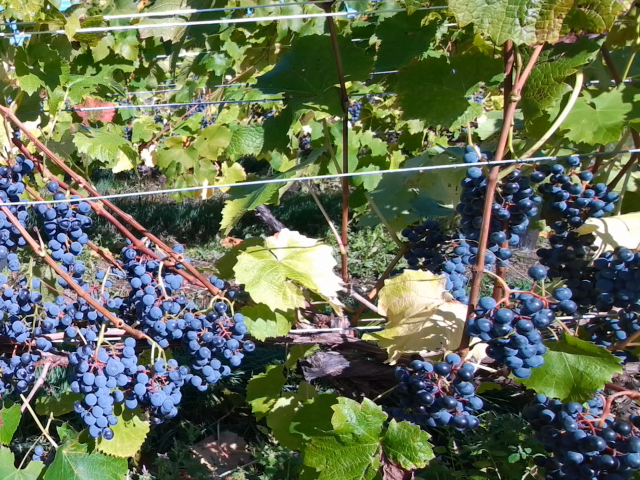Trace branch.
Masks as SVG:
<instances>
[{"label": "branch", "mask_w": 640, "mask_h": 480, "mask_svg": "<svg viewBox=\"0 0 640 480\" xmlns=\"http://www.w3.org/2000/svg\"><path fill=\"white\" fill-rule=\"evenodd\" d=\"M87 245L97 254L102 256L105 259V261L116 270H120L122 268V265L118 261L113 259L107 251H105L100 246H98L93 240H89L87 242Z\"/></svg>", "instance_id": "1af6ec82"}, {"label": "branch", "mask_w": 640, "mask_h": 480, "mask_svg": "<svg viewBox=\"0 0 640 480\" xmlns=\"http://www.w3.org/2000/svg\"><path fill=\"white\" fill-rule=\"evenodd\" d=\"M407 251L406 247H402L401 249H399L395 256L393 257V259L390 261V263L388 264V266L386 267V269L383 270L378 282L376 283L375 287L373 288V290L368 294V299L372 300L373 297L376 295V293L379 291V289L381 288V285L383 284V282L386 279L387 274L393 269L394 265L398 262V259L400 258V256L402 254H404Z\"/></svg>", "instance_id": "1d269e1b"}, {"label": "branch", "mask_w": 640, "mask_h": 480, "mask_svg": "<svg viewBox=\"0 0 640 480\" xmlns=\"http://www.w3.org/2000/svg\"><path fill=\"white\" fill-rule=\"evenodd\" d=\"M2 213L14 224L16 230L21 233L27 243L30 245L32 251L36 253L39 257H41L52 270H54L58 275L62 277V279L73 288V290L83 299H85L91 306L96 308L98 312L112 324L117 325L125 332L132 334L135 338H142L144 333L142 331H138L134 327L126 324L121 319L111 315L97 300H95L91 295H89L85 290H83L79 284L72 279L68 273L62 269L58 264H56L51 257L42 249L39 248L38 244L31 237L29 231L23 227L19 219L9 210L7 206L1 207Z\"/></svg>", "instance_id": "45aa463d"}, {"label": "branch", "mask_w": 640, "mask_h": 480, "mask_svg": "<svg viewBox=\"0 0 640 480\" xmlns=\"http://www.w3.org/2000/svg\"><path fill=\"white\" fill-rule=\"evenodd\" d=\"M503 295H504L503 286L499 282H497V280H494L492 299L495 301L496 308L502 307Z\"/></svg>", "instance_id": "2b1400db"}, {"label": "branch", "mask_w": 640, "mask_h": 480, "mask_svg": "<svg viewBox=\"0 0 640 480\" xmlns=\"http://www.w3.org/2000/svg\"><path fill=\"white\" fill-rule=\"evenodd\" d=\"M606 387L614 392L626 391L628 393V396H627L628 398L633 400H640V392H637L631 389H626L625 387H620L613 382H608L606 384Z\"/></svg>", "instance_id": "8bde2521"}, {"label": "branch", "mask_w": 640, "mask_h": 480, "mask_svg": "<svg viewBox=\"0 0 640 480\" xmlns=\"http://www.w3.org/2000/svg\"><path fill=\"white\" fill-rule=\"evenodd\" d=\"M364 308H365V305H364V304H360V305L357 307V309L355 310V312H354V314H353V316H352V318H351V322H352V323H355V322H356V320H357V318H358L359 314L361 313V311H362Z\"/></svg>", "instance_id": "a944a4c4"}, {"label": "branch", "mask_w": 640, "mask_h": 480, "mask_svg": "<svg viewBox=\"0 0 640 480\" xmlns=\"http://www.w3.org/2000/svg\"><path fill=\"white\" fill-rule=\"evenodd\" d=\"M348 178H343L342 196H343V210H342V253H343V274L342 279L344 282L348 281V233H347V212H348Z\"/></svg>", "instance_id": "ca6c30ca"}, {"label": "branch", "mask_w": 640, "mask_h": 480, "mask_svg": "<svg viewBox=\"0 0 640 480\" xmlns=\"http://www.w3.org/2000/svg\"><path fill=\"white\" fill-rule=\"evenodd\" d=\"M11 142L14 144V146L18 149V151L20 153H22L23 155H25L34 165V167L36 168V170L47 180L51 181H56L59 185V188L65 190L67 193H69L71 196L72 195H81L82 199L84 197V194L81 191H78L74 188H72L69 184H67L66 182H63L62 180H60L58 177L52 175L50 172H48L41 164V162L39 161V159L28 149L26 148L17 137H13L11 139Z\"/></svg>", "instance_id": "ea751061"}, {"label": "branch", "mask_w": 640, "mask_h": 480, "mask_svg": "<svg viewBox=\"0 0 640 480\" xmlns=\"http://www.w3.org/2000/svg\"><path fill=\"white\" fill-rule=\"evenodd\" d=\"M500 176V167L493 165L487 179L486 199L483 210L480 214V230L478 235V251L476 255V264L473 271V281L469 291V301L467 303V316L474 318L476 316V307L478 306V296L482 285V275L485 269V260L487 256V240L489 235V218L494 210L496 183Z\"/></svg>", "instance_id": "170604dd"}, {"label": "branch", "mask_w": 640, "mask_h": 480, "mask_svg": "<svg viewBox=\"0 0 640 480\" xmlns=\"http://www.w3.org/2000/svg\"><path fill=\"white\" fill-rule=\"evenodd\" d=\"M514 41L505 39L503 41V87H504V124L498 133L496 144L493 148V158L500 160L502 152L505 148L506 140L511 133L513 124L516 119V109L519 103L520 94L525 84V79L532 65L543 53L541 46H535L528 56L524 59L513 83V67H512V50Z\"/></svg>", "instance_id": "325d2c04"}, {"label": "branch", "mask_w": 640, "mask_h": 480, "mask_svg": "<svg viewBox=\"0 0 640 480\" xmlns=\"http://www.w3.org/2000/svg\"><path fill=\"white\" fill-rule=\"evenodd\" d=\"M328 26H329V31H330V36H331V41L333 44V50L335 53V63H336V67L338 69V79H339V83H340V88H341V93L343 96V123H342V134H343V172L347 173L348 172V150H349V143H348V132H347V125H348V110H349V103H348V94H347V90H346V85H345V81H344V77H343V67L341 65V61H340V50L338 47V42H337V38H336V33H335V28H334V24H333V17L329 16L328 17Z\"/></svg>", "instance_id": "1ff4a987"}, {"label": "branch", "mask_w": 640, "mask_h": 480, "mask_svg": "<svg viewBox=\"0 0 640 480\" xmlns=\"http://www.w3.org/2000/svg\"><path fill=\"white\" fill-rule=\"evenodd\" d=\"M103 203L110 209H113L121 218L130 222L141 234H143L150 241L156 244L161 250L166 251L176 260L183 263L186 266V268L195 277L186 273L176 265H173L166 257L145 248L144 245L139 241V238L133 232L129 231L122 223H119L118 221H116L106 209H104L102 206L97 204L95 200L88 201V205L93 210L101 214L110 226L116 228L125 237L129 238L132 241L133 245L145 257H148L152 260H156L162 263L164 266H166L168 270L180 276L185 281H188L189 283L194 285L196 288L203 289L204 287H206L208 290H210L213 293L215 297H218L220 295V290L215 285H213L204 275H202V273L184 255L177 252L173 247L169 246L168 244L162 242L159 237H157L155 234L151 233L148 229H146L135 217H133L132 215L124 211L116 202H113L110 199L105 198L103 200Z\"/></svg>", "instance_id": "30e6481e"}, {"label": "branch", "mask_w": 640, "mask_h": 480, "mask_svg": "<svg viewBox=\"0 0 640 480\" xmlns=\"http://www.w3.org/2000/svg\"><path fill=\"white\" fill-rule=\"evenodd\" d=\"M0 113L5 117H8L10 120L16 123L18 129L29 138V140L40 149L45 157L51 160L61 171L65 172L71 179H73L86 193L91 195L92 197H96L100 195L98 190L93 189L89 186L77 173H75L70 167L65 165L58 157H56L47 146L41 142L25 125L23 120L15 115L10 110L6 109L3 104H0Z\"/></svg>", "instance_id": "982ccf7c"}]
</instances>
